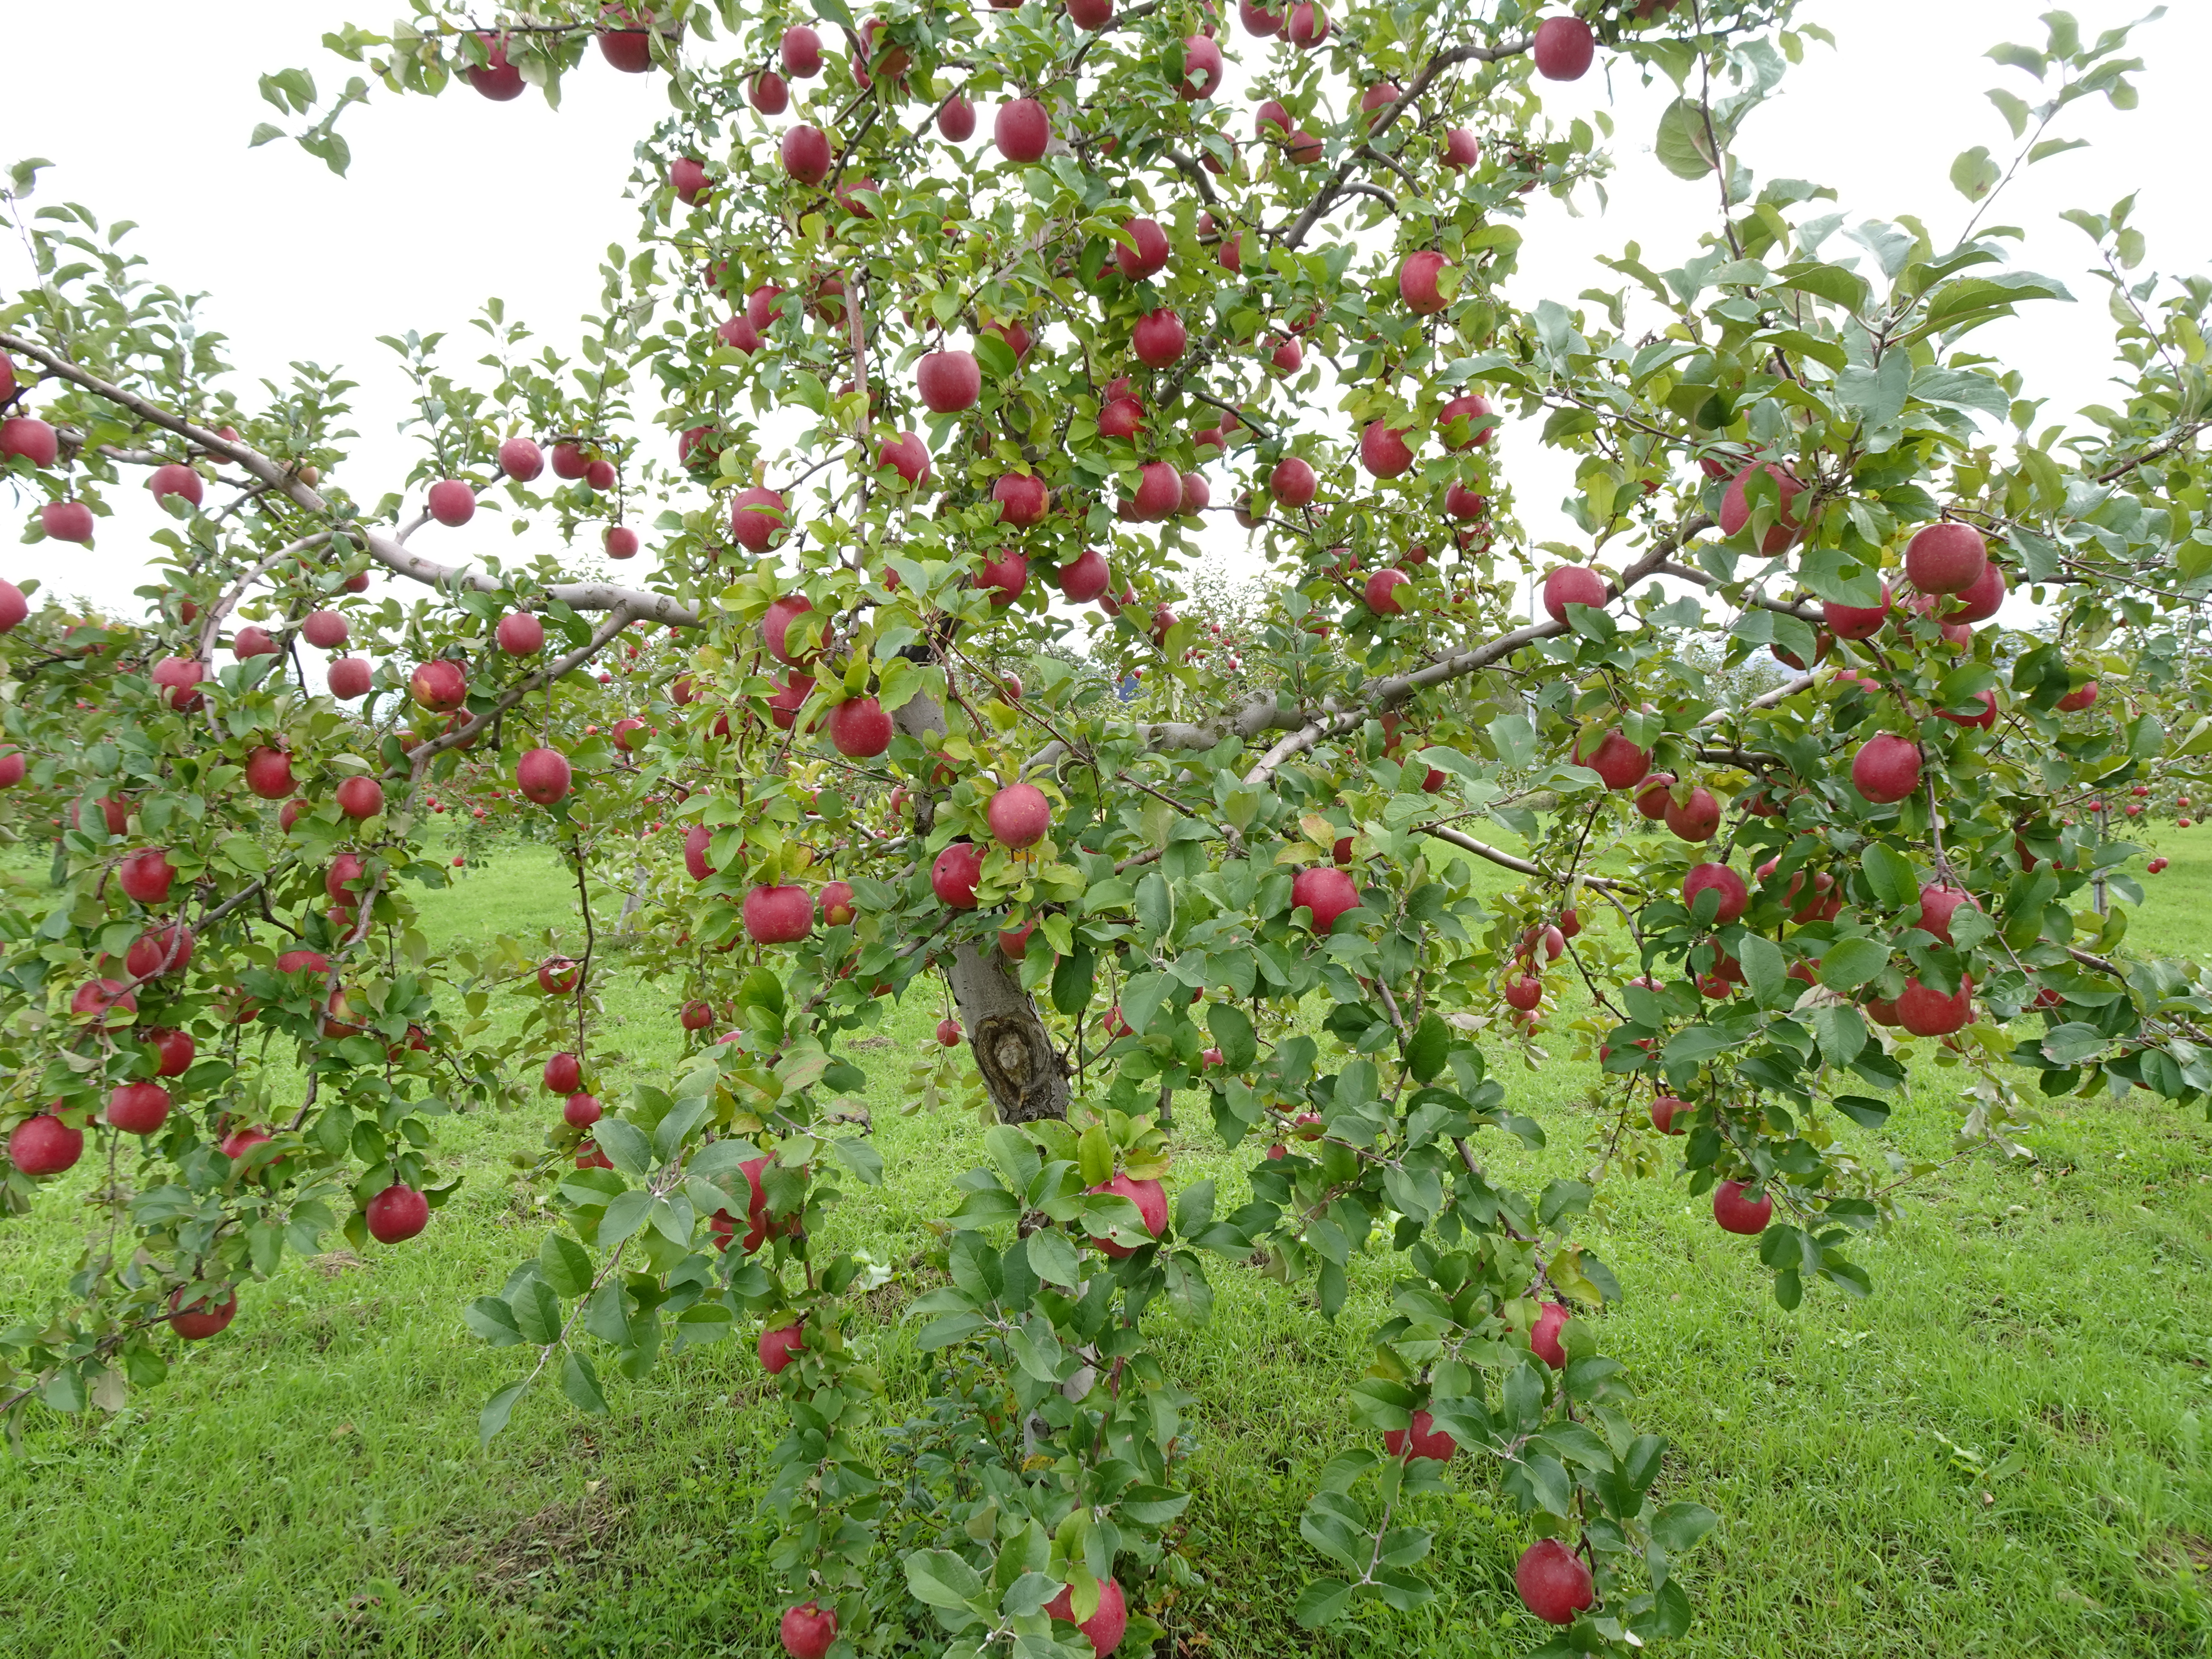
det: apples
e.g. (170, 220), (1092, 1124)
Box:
(795, 783), (831, 818)
(901, 288), (948, 331)
(1374, 708), (1420, 761)
(1199, 126), (1241, 176)
(1290, 3), (1334, 50)
(947, 672), (980, 698)
(749, 791), (769, 812)
(778, 24), (825, 80)
(763, 1151), (814, 1202)
(932, 208), (961, 242)
(1295, 608), (1334, 643)
(1703, 931), (1748, 982)
(1628, 703), (1660, 730)
(835, 943), (896, 1000)
(1, 414), (59, 473)
(432, 801), (449, 815)
(1500, 1299), (1575, 1374)
(1056, 545), (1110, 608)
(1757, 858), (1781, 889)
(586, 722), (600, 737)
(1516, 1535), (1599, 1627)
(35, 1075), (91, 1132)
(244, 734), (307, 800)
(1132, 668), (1144, 682)
(832, 164), (884, 227)
(1542, 564), (1611, 625)
(64, 614), (117, 664)
(324, 846), (391, 907)
(1217, 398), (1268, 450)
(1893, 959), (1971, 1038)
(2047, 667), (2098, 712)
(718, 997), (753, 1032)
(119, 845), (181, 904)
(1356, 963), (1411, 1011)
(1349, 877), (1375, 906)
(712, 927), (737, 955)
(1767, 614), (1836, 670)
(387, 1016), (433, 1068)
(1055, 943), (1083, 974)
(1721, 406), (1776, 457)
(138, 1027), (194, 1080)
(1132, 304), (1189, 371)
(766, 1207), (811, 1250)
(1208, 624), (1225, 636)
(595, 673), (614, 690)
(1501, 149), (1543, 194)
(537, 953), (580, 993)
(273, 948), (335, 1015)
(1630, 456), (1667, 498)
(1713, 1176), (1773, 1235)
(586, 459), (617, 491)
(1226, 659), (1238, 673)
(426, 650), (477, 698)
(1906, 522), (1987, 598)
(921, 740), (971, 787)
(379, 730), (433, 780)
(1284, 130), (1326, 169)
(730, 485), (795, 555)
(1853, 732), (1922, 807)
(573, 819), (591, 836)
(1930, 613), (1978, 659)
(639, 619), (650, 633)
(551, 439), (593, 481)
(463, 27), (535, 103)
(618, 659), (641, 678)
(1505, 973), (1543, 1011)
(702, 1149), (776, 1222)
(755, 1313), (822, 1378)
(1793, 813), (1833, 843)
(669, 626), (684, 639)
(702, 257), (747, 301)
(214, 1104), (279, 1153)
(936, 1019), (964, 1047)
(473, 804), (487, 822)
(996, 903), (1053, 963)
(671, 668), (715, 708)
(1719, 460), (1820, 561)
(1533, 14), (1595, 85)
(564, 1091), (603, 1130)
(1116, 674), (1127, 686)
(9, 1108), (86, 1178)
(427, 476), (478, 529)
(1456, 521), (1494, 555)
(1663, 781), (1723, 843)
(594, 2), (662, 74)
(1418, 588), (1454, 619)
(1523, 921), (1566, 962)
(2177, 794), (2190, 806)
(1926, 675), (1998, 741)
(642, 725), (663, 742)
(1738, 774), (1774, 821)
(96, 934), (163, 989)
(1820, 573), (1891, 640)
(868, 429), (930, 496)
(992, 94), (1050, 164)
(1587, 724), (1654, 791)
(1191, 645), (1212, 660)
(1289, 866), (1361, 941)
(1116, 483), (1150, 523)
(888, 780), (927, 820)
(211, 975), (261, 1025)
(968, 542), (1027, 609)
(1445, 586), (1477, 622)
(644, 793), (662, 813)
(1293, 1109), (1328, 1142)
(652, 820), (668, 835)
(1773, 868), (1844, 932)
(1547, 902), (1588, 941)
(819, 878), (862, 934)
(1080, 843), (1107, 867)
(1786, 955), (1850, 1005)
(714, 313), (769, 369)
(851, 44), (905, 93)
(1350, 757), (1360, 768)
(517, 746), (573, 809)
(965, 229), (993, 261)
(1756, 769), (1820, 822)
(1363, 326), (1402, 366)
(165, 1275), (238, 1343)
(312, 981), (373, 1039)
(1327, 823), (1374, 874)
(709, 1212), (771, 1258)
(1099, 569), (1132, 621)
(628, 621), (639, 631)
(106, 1077), (172, 1138)
(867, 542), (931, 607)
(328, 904), (374, 946)
(152, 656), (217, 716)
(678, 1000), (716, 1034)
(2089, 802), (2101, 812)
(498, 435), (545, 483)
(1286, 305), (1321, 341)
(986, 780), (1052, 851)
(1382, 1393), (1455, 1473)
(2118, 1032), (2177, 1092)
(278, 797), (321, 839)
(1201, 1044), (1237, 1080)
(1320, 543), (1361, 583)
(1699, 431), (1759, 487)
(1011, 1568), (1127, 1659)
(1143, 609), (1184, 648)
(1225, 308), (1261, 347)
(120, 661), (141, 678)
(1223, 965), (1255, 998)
(1455, 961), (1480, 983)
(1892, 594), (1954, 651)
(1600, 1029), (1660, 1075)
(231, 625), (280, 667)
(865, 827), (895, 862)
(69, 784), (138, 841)
(834, 379), (883, 424)
(993, 469), (1050, 530)
(1114, 214), (1170, 284)
(1255, 328), (1303, 381)
(779, 749), (792, 760)
(831, 840), (850, 857)
(623, 637), (649, 662)
(1682, 859), (1749, 928)
(1163, 33), (1224, 103)
(1231, 1084), (1251, 1106)
(151, 461), (203, 520)
(1902, 885), (1985, 950)
(982, 1412), (1009, 1435)
(1264, 1138), (1295, 1171)
(978, 313), (1032, 369)
(1097, 396), (1151, 452)
(1939, 1006), (1987, 1054)
(986, 0), (1026, 15)
(800, 260), (861, 326)
(915, 349), (982, 412)
(1082, 1166), (1170, 1261)
(190, 852), (224, 889)
(1343, 749), (1354, 762)
(601, 525), (640, 561)
(797, 841), (816, 867)
(704, 699), (754, 746)
(675, 780), (713, 806)
(935, 93), (977, 143)
(741, 880), (813, 945)
(1123, 459), (1182, 524)
(1651, 1094), (1698, 1138)
(684, 821), (751, 884)
(1102, 374), (1156, 413)
(763, 593), (836, 668)
(1103, 1001), (1136, 1041)
(611, 718), (644, 753)
(2012, 818), (2083, 878)
(1621, 0), (1683, 22)
(496, 612), (546, 660)
(1220, 634), (1236, 647)
(197, 421), (243, 465)
(1390, 739), (1450, 797)
(1445, 473), (1490, 521)
(1096, 120), (1135, 156)
(1190, 421), (1227, 461)
(1568, 731), (1609, 788)
(744, 70), (790, 116)
(1363, 569), (1416, 622)
(937, 487), (965, 519)
(2125, 803), (2142, 814)
(69, 977), (139, 1037)
(2156, 855), (2169, 870)
(366, 1181), (432, 1247)
(1198, 205), (1234, 251)
(711, 1030), (764, 1074)
(826, 694), (895, 759)
(1936, 557), (2008, 626)
(1173, 471), (1211, 519)
(834, 307), (879, 351)
(780, 124), (833, 187)
(1044, 258), (1083, 294)
(1256, 100), (1298, 146)
(453, 853), (468, 871)
(1360, 416), (1418, 482)
(486, 786), (515, 816)
(444, 713), (487, 751)
(0, 573), (31, 637)
(1173, 970), (1204, 1004)
(39, 494), (96, 544)
(575, 1136), (618, 1180)
(1865, 975), (1899, 1029)
(928, 841), (1005, 910)
(156, 582), (217, 630)
(1234, 488), (1275, 528)
(2131, 783), (2150, 800)
(1697, 964), (1734, 1003)
(1301, 507), (1334, 537)
(2178, 818), (2190, 827)
(140, 921), (194, 973)
(669, 155), (720, 210)
(1271, 454), (1318, 510)
(1505, 959), (1545, 986)
(760, 666), (835, 739)
(1090, 247), (1121, 285)
(1063, 0), (1113, 31)
(744, 283), (796, 341)
(778, 1594), (839, 1659)
(957, 420), (995, 456)
(873, 72), (912, 104)
(468, 760), (481, 775)
(217, 1122), (285, 1184)
(1429, 128), (1481, 178)
(1219, 231), (1259, 276)
(1828, 662), (1881, 706)
(324, 657), (380, 701)
(1436, 391), (1496, 457)
(1084, 972), (1099, 986)
(1399, 248), (1459, 319)
(1236, 0), (1286, 38)
(709, 891), (743, 923)
(543, 1048), (587, 1094)
(408, 659), (469, 714)
(987, 666), (1025, 708)
(1631, 771), (1681, 823)
(301, 609), (351, 650)
(2017, 950), (2074, 1007)
(1153, 597), (1176, 614)
(677, 419), (729, 478)
(0, 740), (27, 794)
(1627, 974), (1667, 1012)
(860, 13), (923, 72)
(0, 346), (17, 404)
(1508, 1009), (1547, 1039)
(1396, 535), (1429, 566)
(1362, 81), (1404, 132)
(342, 565), (371, 594)
(280, 454), (323, 494)
(669, 919), (702, 950)
(1275, 1089), (1296, 1114)
(335, 772), (385, 825)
